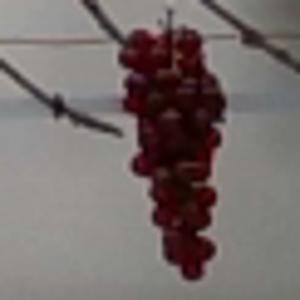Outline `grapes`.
Masks as SVG:
<instances>
[{"mask_svg": "<svg viewBox=\"0 0 300 300\" xmlns=\"http://www.w3.org/2000/svg\"><path fill=\"white\" fill-rule=\"evenodd\" d=\"M204 50L198 28L170 29L153 37L137 27L117 54L118 64L128 71L121 107L136 118L141 150L131 156L128 169L135 178L150 180L148 195L156 204L151 222L162 232V259L190 285L204 281L206 264L218 253L215 240L199 234L212 225L211 211L218 203L217 190L208 181L224 135L214 120L230 107Z\"/></svg>", "mask_w": 300, "mask_h": 300, "instance_id": "01657485", "label": "grapes"}]
</instances>
